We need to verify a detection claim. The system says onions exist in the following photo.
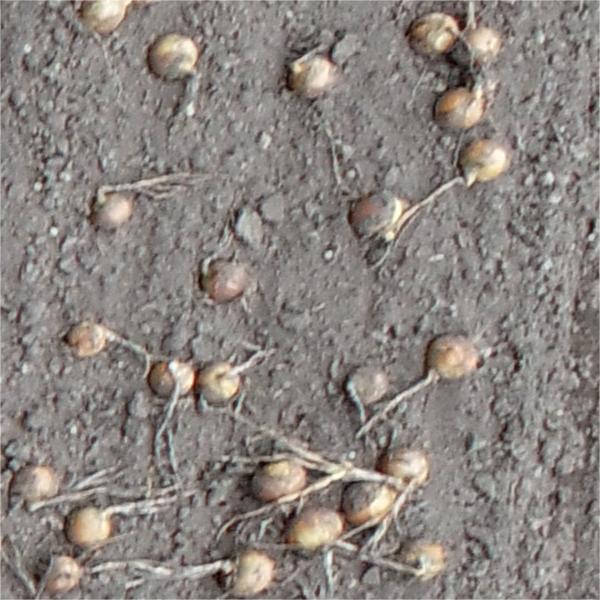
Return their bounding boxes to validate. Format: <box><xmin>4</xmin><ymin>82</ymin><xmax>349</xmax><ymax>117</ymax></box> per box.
<box><xmin>427</xmin><ymin>334</ymin><xmax>479</xmax><ymax>380</ymax></box>
<box><xmin>67</xmin><ymin>507</ymin><xmax>113</xmax><ymax>545</ymax></box>
<box><xmin>224</xmin><ymin>549</ymin><xmax>274</xmax><ymax>594</ymax></box>
<box><xmin>407</xmin><ymin>540</ymin><xmax>444</xmax><ymax>581</ymax></box>
<box><xmin>200</xmin><ymin>361</ymin><xmax>238</xmax><ymax>402</ymax></box>
<box><xmin>255</xmin><ymin>457</ymin><xmax>302</xmax><ymax>500</ymax></box>
<box><xmin>12</xmin><ymin>463</ymin><xmax>56</xmax><ymax>505</ymax></box>
<box><xmin>147</xmin><ymin>32</ymin><xmax>195</xmax><ymax>78</ymax></box>
<box><xmin>289</xmin><ymin>505</ymin><xmax>341</xmax><ymax>550</ymax></box>
<box><xmin>461</xmin><ymin>25</ymin><xmax>501</xmax><ymax>64</ymax></box>
<box><xmin>408</xmin><ymin>11</ymin><xmax>456</xmax><ymax>54</ymax></box>
<box><xmin>76</xmin><ymin>0</ymin><xmax>124</xmax><ymax>33</ymax></box>
<box><xmin>343</xmin><ymin>479</ymin><xmax>397</xmax><ymax>527</ymax></box>
<box><xmin>434</xmin><ymin>86</ymin><xmax>480</xmax><ymax>129</ymax></box>
<box><xmin>382</xmin><ymin>449</ymin><xmax>428</xmax><ymax>485</ymax></box>
<box><xmin>149</xmin><ymin>360</ymin><xmax>195</xmax><ymax>396</ymax></box>
<box><xmin>66</xmin><ymin>319</ymin><xmax>102</xmax><ymax>356</ymax></box>
<box><xmin>459</xmin><ymin>139</ymin><xmax>508</xmax><ymax>181</ymax></box>
<box><xmin>201</xmin><ymin>258</ymin><xmax>248</xmax><ymax>302</ymax></box>
<box><xmin>351</xmin><ymin>192</ymin><xmax>401</xmax><ymax>235</ymax></box>
<box><xmin>41</xmin><ymin>554</ymin><xmax>81</xmax><ymax>593</ymax></box>
<box><xmin>95</xmin><ymin>190</ymin><xmax>133</xmax><ymax>228</ymax></box>
<box><xmin>346</xmin><ymin>366</ymin><xmax>391</xmax><ymax>404</ymax></box>
<box><xmin>290</xmin><ymin>53</ymin><xmax>337</xmax><ymax>98</ymax></box>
